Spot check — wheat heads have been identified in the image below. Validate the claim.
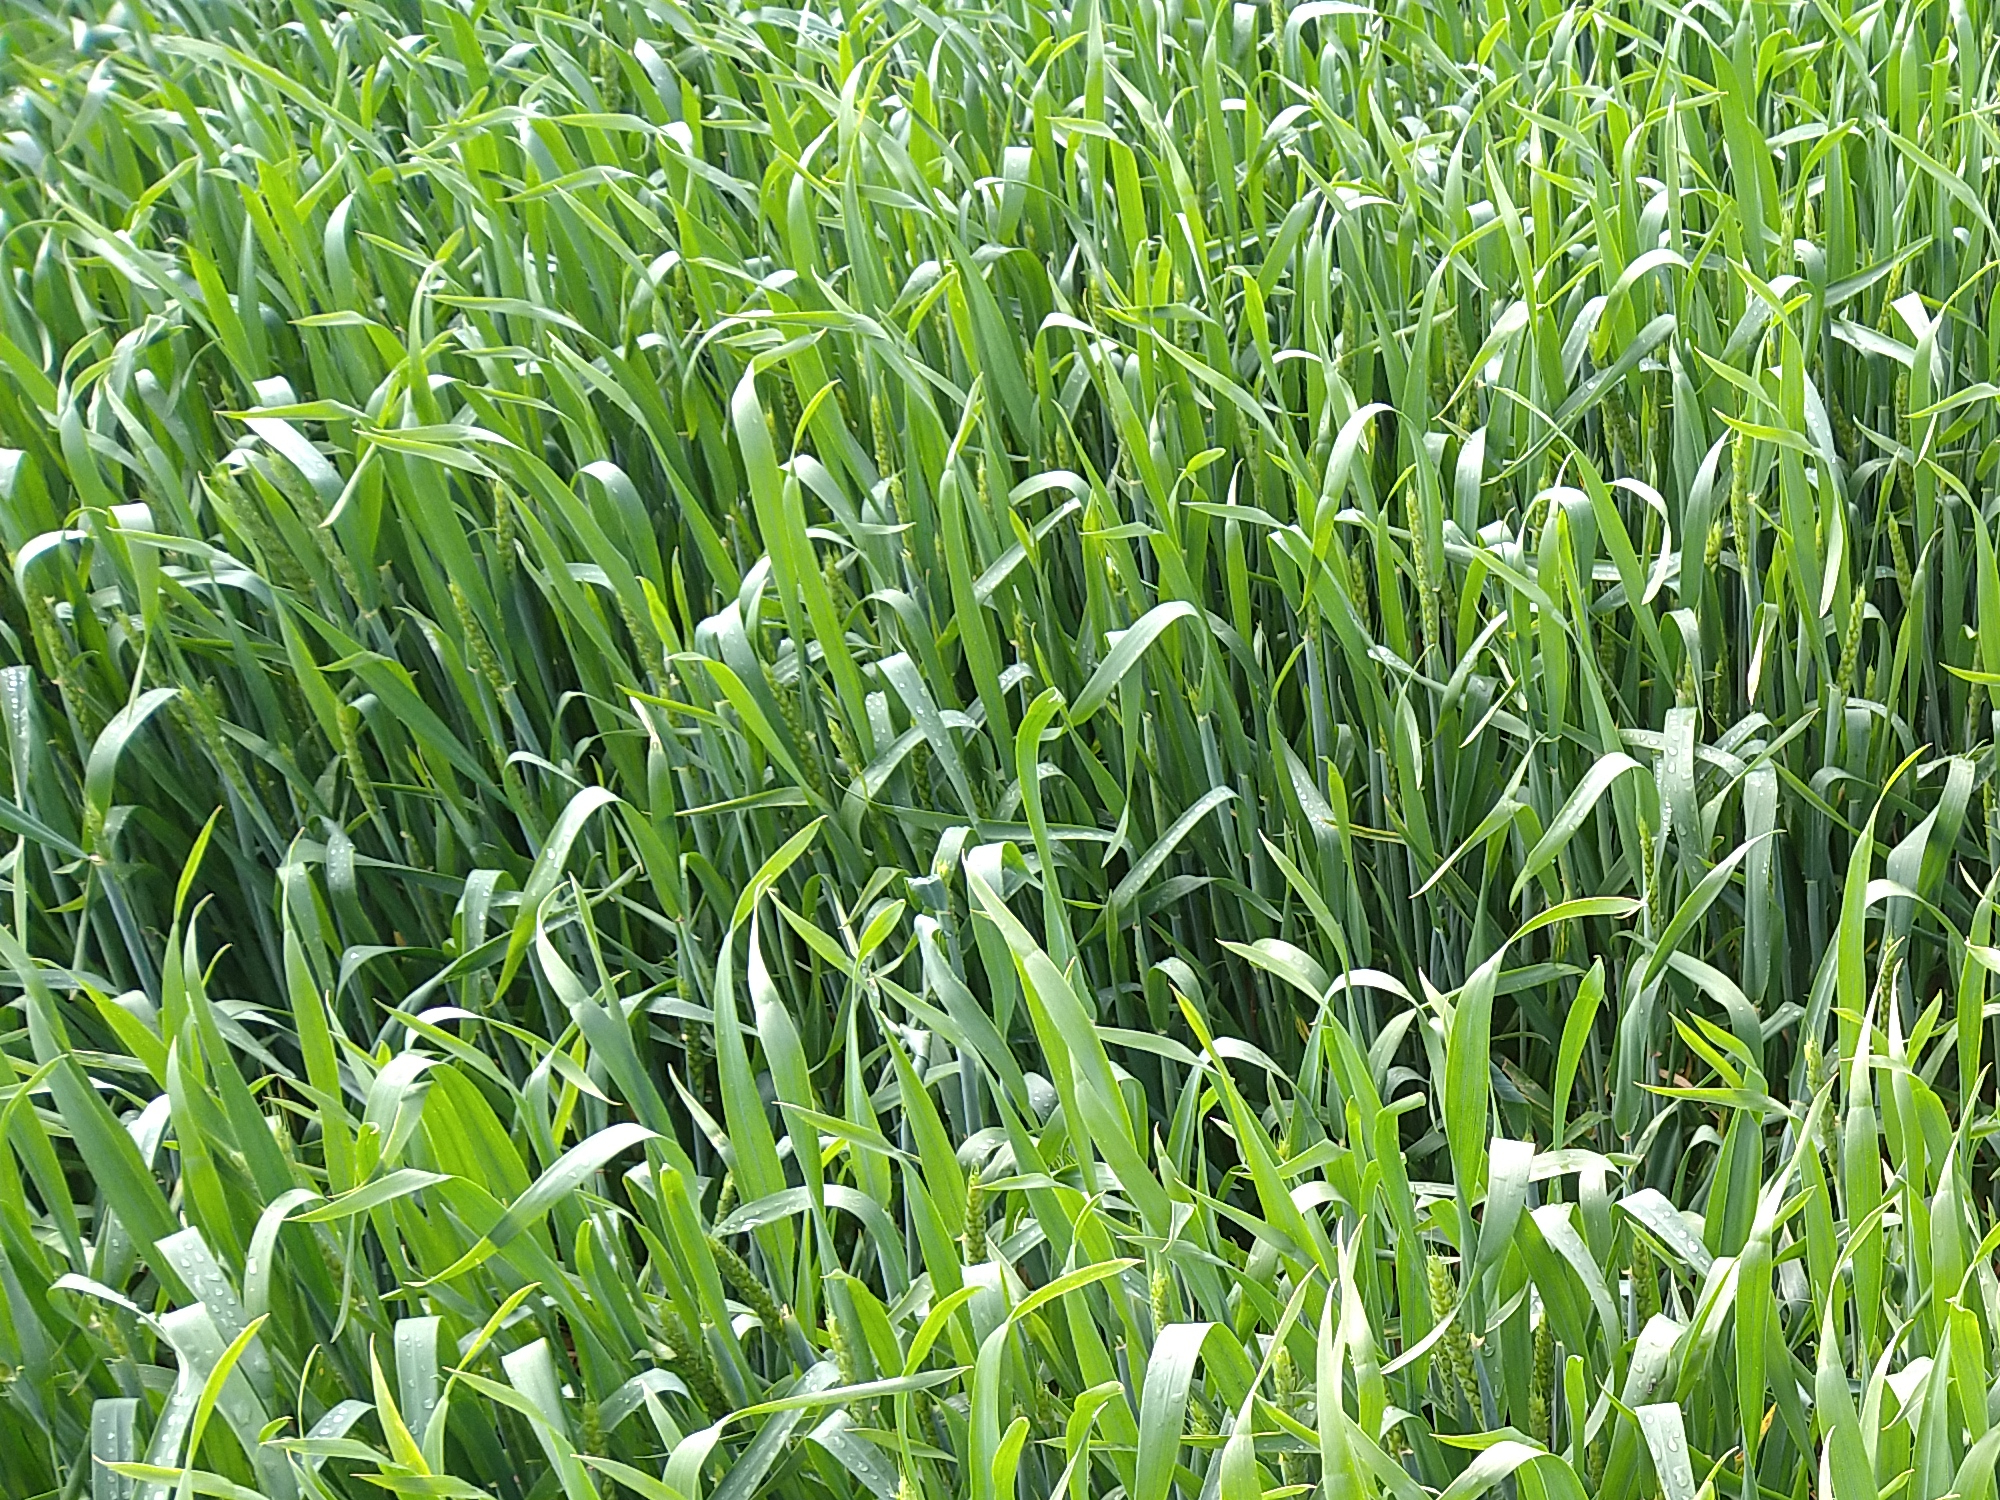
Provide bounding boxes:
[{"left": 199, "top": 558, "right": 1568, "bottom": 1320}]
[
  {"left": 1381, "top": 721, "right": 1397, "bottom": 798},
  {"left": 119, "top": 613, "right": 204, "bottom": 744},
  {"left": 1114, "top": 407, "right": 1135, "bottom": 481},
  {"left": 1341, "top": 300, "right": 1358, "bottom": 393},
  {"left": 704, "top": 1230, "right": 786, "bottom": 1342},
  {"left": 1237, "top": 405, "right": 1260, "bottom": 505},
  {"left": 824, "top": 548, "right": 842, "bottom": 623},
  {"left": 87, "top": 1294, "right": 132, "bottom": 1362},
  {"left": 912, "top": 723, "right": 934, "bottom": 810},
  {"left": 1109, "top": 557, "right": 1125, "bottom": 596},
  {"left": 893, "top": 473, "right": 909, "bottom": 548},
  {"left": 165, "top": 708, "right": 196, "bottom": 778},
  {"left": 1492, "top": 480, "right": 1516, "bottom": 531},
  {"left": 603, "top": 27, "right": 623, "bottom": 110},
  {"left": 1648, "top": 357, "right": 1667, "bottom": 471},
  {"left": 961, "top": 757, "right": 993, "bottom": 818},
  {"left": 1732, "top": 433, "right": 1753, "bottom": 564},
  {"left": 1637, "top": 149, "right": 1655, "bottom": 207},
  {"left": 1026, "top": 347, "right": 1035, "bottom": 395},
  {"left": 660, "top": 1307, "right": 731, "bottom": 1420},
  {"left": 200, "top": 673, "right": 225, "bottom": 732},
  {"left": 1635, "top": 1234, "right": 1650, "bottom": 1333},
  {"left": 1442, "top": 350, "right": 1455, "bottom": 390},
  {"left": 269, "top": 451, "right": 362, "bottom": 596},
  {"left": 1776, "top": 218, "right": 1794, "bottom": 275},
  {"left": 871, "top": 394, "right": 889, "bottom": 478},
  {"left": 1878, "top": 943, "right": 1897, "bottom": 1037},
  {"left": 1713, "top": 659, "right": 1723, "bottom": 721},
  {"left": 1820, "top": 1102, "right": 1841, "bottom": 1184},
  {"left": 1044, "top": 451, "right": 1066, "bottom": 530},
  {"left": 985, "top": 98, "right": 998, "bottom": 159},
  {"left": 963, "top": 1167, "right": 988, "bottom": 1264},
  {"left": 1272, "top": 1348, "right": 1311, "bottom": 1500},
  {"left": 1888, "top": 516, "right": 1908, "bottom": 608},
  {"left": 1406, "top": 491, "right": 1432, "bottom": 639},
  {"left": 1175, "top": 272, "right": 1191, "bottom": 351},
  {"left": 1555, "top": 914, "right": 1572, "bottom": 964},
  {"left": 1308, "top": 596, "right": 1324, "bottom": 688},
  {"left": 714, "top": 1172, "right": 737, "bottom": 1238},
  {"left": 1137, "top": 929, "right": 1146, "bottom": 985},
  {"left": 1840, "top": 587, "right": 1866, "bottom": 692},
  {"left": 934, "top": 306, "right": 958, "bottom": 420},
  {"left": 733, "top": 513, "right": 753, "bottom": 568},
  {"left": 833, "top": 385, "right": 847, "bottom": 420},
  {"left": 1152, "top": 1272, "right": 1173, "bottom": 1342},
  {"left": 1803, "top": 198, "right": 1816, "bottom": 239},
  {"left": 1438, "top": 294, "right": 1479, "bottom": 418},
  {"left": 254, "top": 752, "right": 281, "bottom": 827},
  {"left": 976, "top": 458, "right": 993, "bottom": 530},
  {"left": 781, "top": 360, "right": 809, "bottom": 448},
  {"left": 686, "top": 996, "right": 703, "bottom": 1097},
  {"left": 1385, "top": 1373, "right": 1408, "bottom": 1460},
  {"left": 282, "top": 745, "right": 309, "bottom": 813},
  {"left": 1641, "top": 814, "right": 1658, "bottom": 929},
  {"left": 33, "top": 593, "right": 89, "bottom": 750},
  {"left": 759, "top": 658, "right": 819, "bottom": 788},
  {"left": 653, "top": 301, "right": 666, "bottom": 376},
  {"left": 618, "top": 591, "right": 682, "bottom": 748},
  {"left": 1410, "top": 43, "right": 1429, "bottom": 112},
  {"left": 272, "top": 1128, "right": 294, "bottom": 1171},
  {"left": 1528, "top": 1393, "right": 1545, "bottom": 1445},
  {"left": 1601, "top": 410, "right": 1612, "bottom": 451},
  {"left": 1537, "top": 1322, "right": 1552, "bottom": 1450},
  {"left": 1896, "top": 372, "right": 1913, "bottom": 501},
  {"left": 219, "top": 472, "right": 310, "bottom": 582},
  {"left": 676, "top": 265, "right": 691, "bottom": 316},
  {"left": 584, "top": 1400, "right": 617, "bottom": 1500},
  {"left": 1088, "top": 277, "right": 1106, "bottom": 331},
  {"left": 1458, "top": 408, "right": 1473, "bottom": 452},
  {"left": 494, "top": 485, "right": 512, "bottom": 574},
  {"left": 939, "top": 93, "right": 953, "bottom": 140},
  {"left": 511, "top": 762, "right": 543, "bottom": 837},
  {"left": 916, "top": 1396, "right": 954, "bottom": 1465},
  {"left": 180, "top": 684, "right": 256, "bottom": 802},
  {"left": 829, "top": 719, "right": 864, "bottom": 778},
  {"left": 1595, "top": 360, "right": 1641, "bottom": 478},
  {"left": 1036, "top": 1373, "right": 1052, "bottom": 1420},
  {"left": 337, "top": 703, "right": 377, "bottom": 810},
  {"left": 1429, "top": 380, "right": 1446, "bottom": 412},
  {"left": 1197, "top": 120, "right": 1209, "bottom": 193},
  {"left": 1717, "top": 265, "right": 1727, "bottom": 318},
  {"left": 1601, "top": 607, "right": 1612, "bottom": 692},
  {"left": 1435, "top": 1317, "right": 1452, "bottom": 1410},
  {"left": 1729, "top": 928, "right": 1738, "bottom": 987},
  {"left": 934, "top": 531, "right": 948, "bottom": 596},
  {"left": 1187, "top": 1396, "right": 1219, "bottom": 1460},
  {"left": 1703, "top": 519, "right": 1721, "bottom": 575},
  {"left": 1589, "top": 1440, "right": 1604, "bottom": 1493},
  {"left": 751, "top": 215, "right": 758, "bottom": 252},
  {"left": 823, "top": 1292, "right": 861, "bottom": 1409},
  {"left": 1983, "top": 784, "right": 1998, "bottom": 842},
  {"left": 451, "top": 579, "right": 506, "bottom": 702},
  {"left": 1015, "top": 608, "right": 1038, "bottom": 708},
  {"left": 1535, "top": 474, "right": 1548, "bottom": 541},
  {"left": 1056, "top": 432, "right": 1085, "bottom": 522},
  {"left": 1351, "top": 549, "right": 1369, "bottom": 630},
  {"left": 1445, "top": 571, "right": 1460, "bottom": 636},
  {"left": 1827, "top": 377, "right": 1859, "bottom": 460},
  {"left": 1877, "top": 262, "right": 1904, "bottom": 333},
  {"left": 1345, "top": 471, "right": 1361, "bottom": 506},
  {"left": 1968, "top": 646, "right": 1985, "bottom": 744},
  {"left": 312, "top": 1225, "right": 365, "bottom": 1300},
  {"left": 231, "top": 1152, "right": 254, "bottom": 1183},
  {"left": 1814, "top": 514, "right": 1824, "bottom": 556},
  {"left": 1681, "top": 650, "right": 1694, "bottom": 702},
  {"left": 1426, "top": 1256, "right": 1486, "bottom": 1428},
  {"left": 1271, "top": 0, "right": 1285, "bottom": 68}
]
